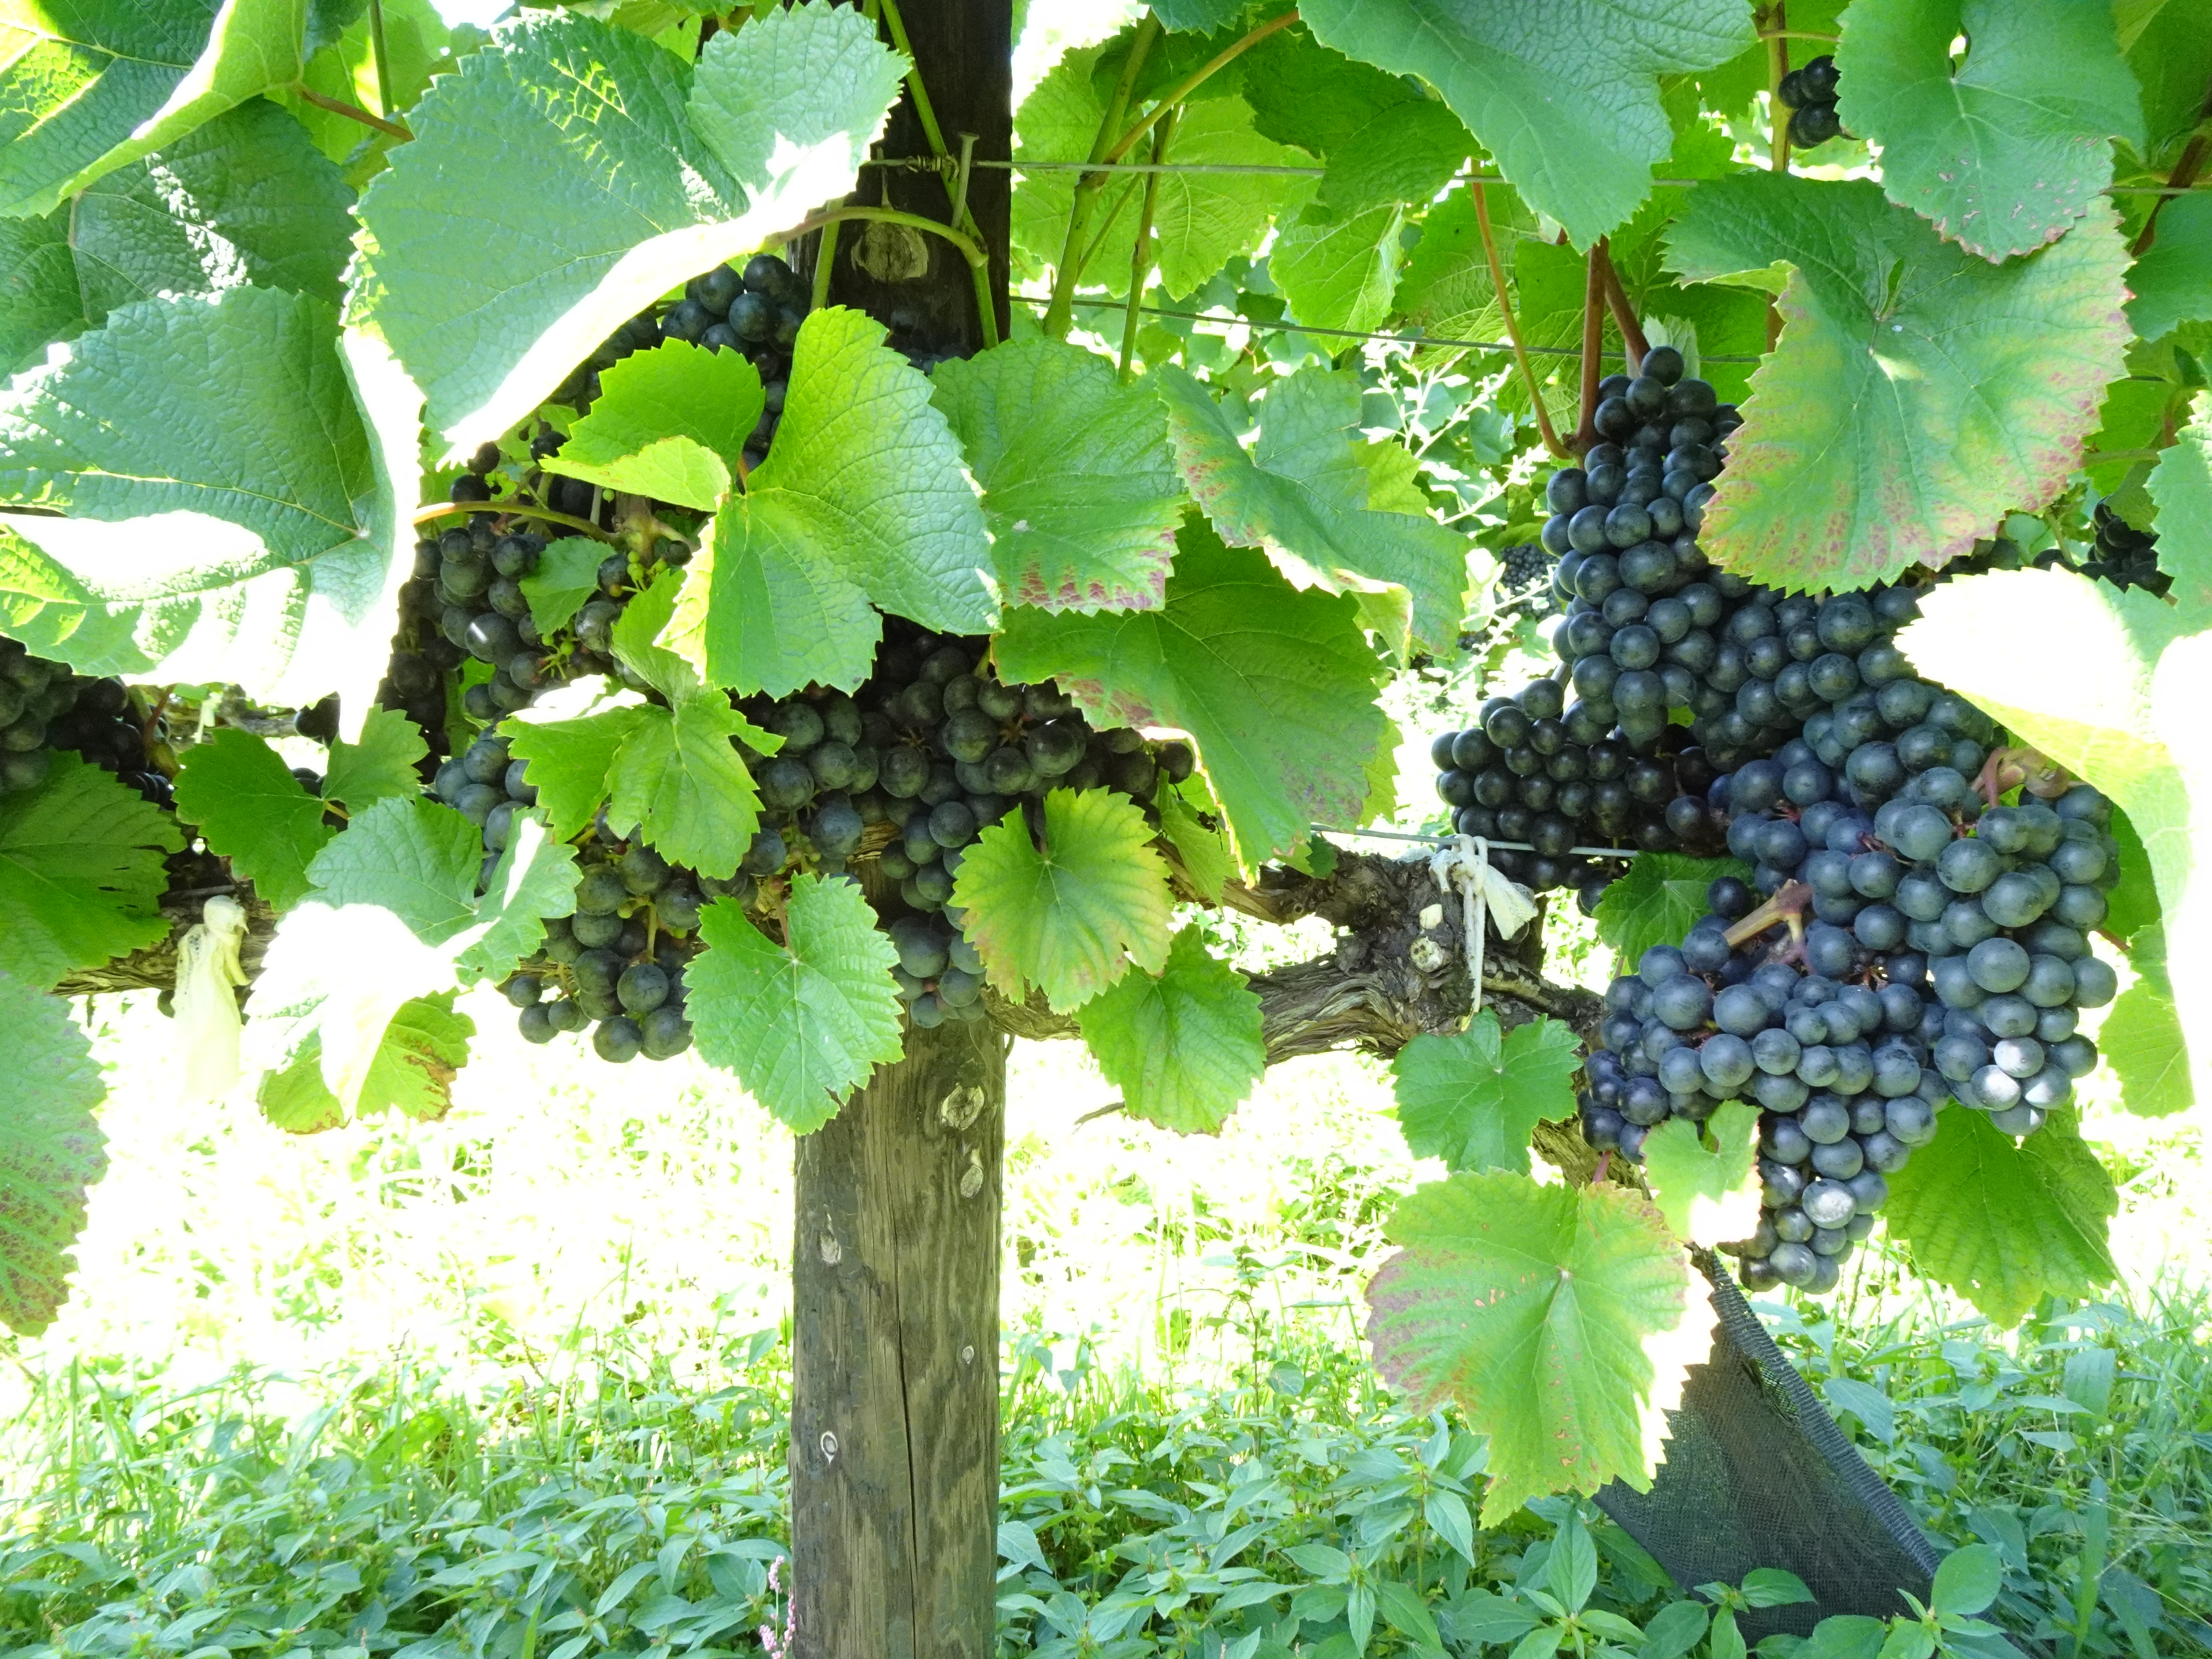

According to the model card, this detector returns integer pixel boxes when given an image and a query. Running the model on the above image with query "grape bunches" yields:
[374,522,470,785]
[660,357,665,364]
[882,330,976,376]
[1847,766,2115,1134]
[1432,679,1591,891]
[571,793,758,1060]
[1578,723,1723,918]
[1778,54,1859,149]
[153,839,242,901]
[49,675,176,806]
[1717,918,1949,1295]
[662,251,810,476]
[2093,501,2163,590]
[291,768,346,828]
[852,632,1097,1027]
[1592,345,1744,454]
[410,441,619,730]
[1799,571,2009,815]
[0,637,79,802]
[1059,715,1193,830]
[1541,444,1753,746]
[527,307,662,461]
[573,534,692,698]
[724,680,864,896]
[1706,737,1873,926]
[435,737,588,1045]
[293,691,340,749]
[1577,877,1767,1164]
[1674,586,1823,785]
